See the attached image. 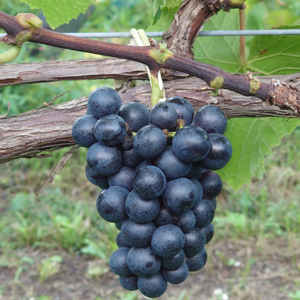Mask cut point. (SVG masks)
<instances>
[{
  "label": "cut point",
  "instance_id": "obj_1",
  "mask_svg": "<svg viewBox=\"0 0 300 300\" xmlns=\"http://www.w3.org/2000/svg\"><path fill=\"white\" fill-rule=\"evenodd\" d=\"M148 66L152 80L151 91V108L153 105L159 102V78L158 74L161 68H166L163 64L144 63Z\"/></svg>",
  "mask_w": 300,
  "mask_h": 300
}]
</instances>
